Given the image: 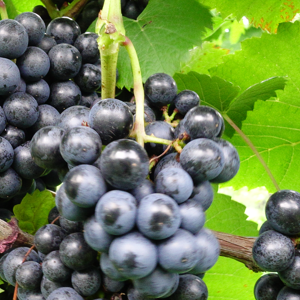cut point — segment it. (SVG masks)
<instances>
[{
  "mask_svg": "<svg viewBox=\"0 0 300 300\" xmlns=\"http://www.w3.org/2000/svg\"><path fill=\"white\" fill-rule=\"evenodd\" d=\"M122 47H125L129 54V59L133 68V94H143L142 77L139 65V56L131 40L128 37L124 38V42L121 43Z\"/></svg>",
  "mask_w": 300,
  "mask_h": 300,
  "instance_id": "6a23745f",
  "label": "cut point"
}]
</instances>
